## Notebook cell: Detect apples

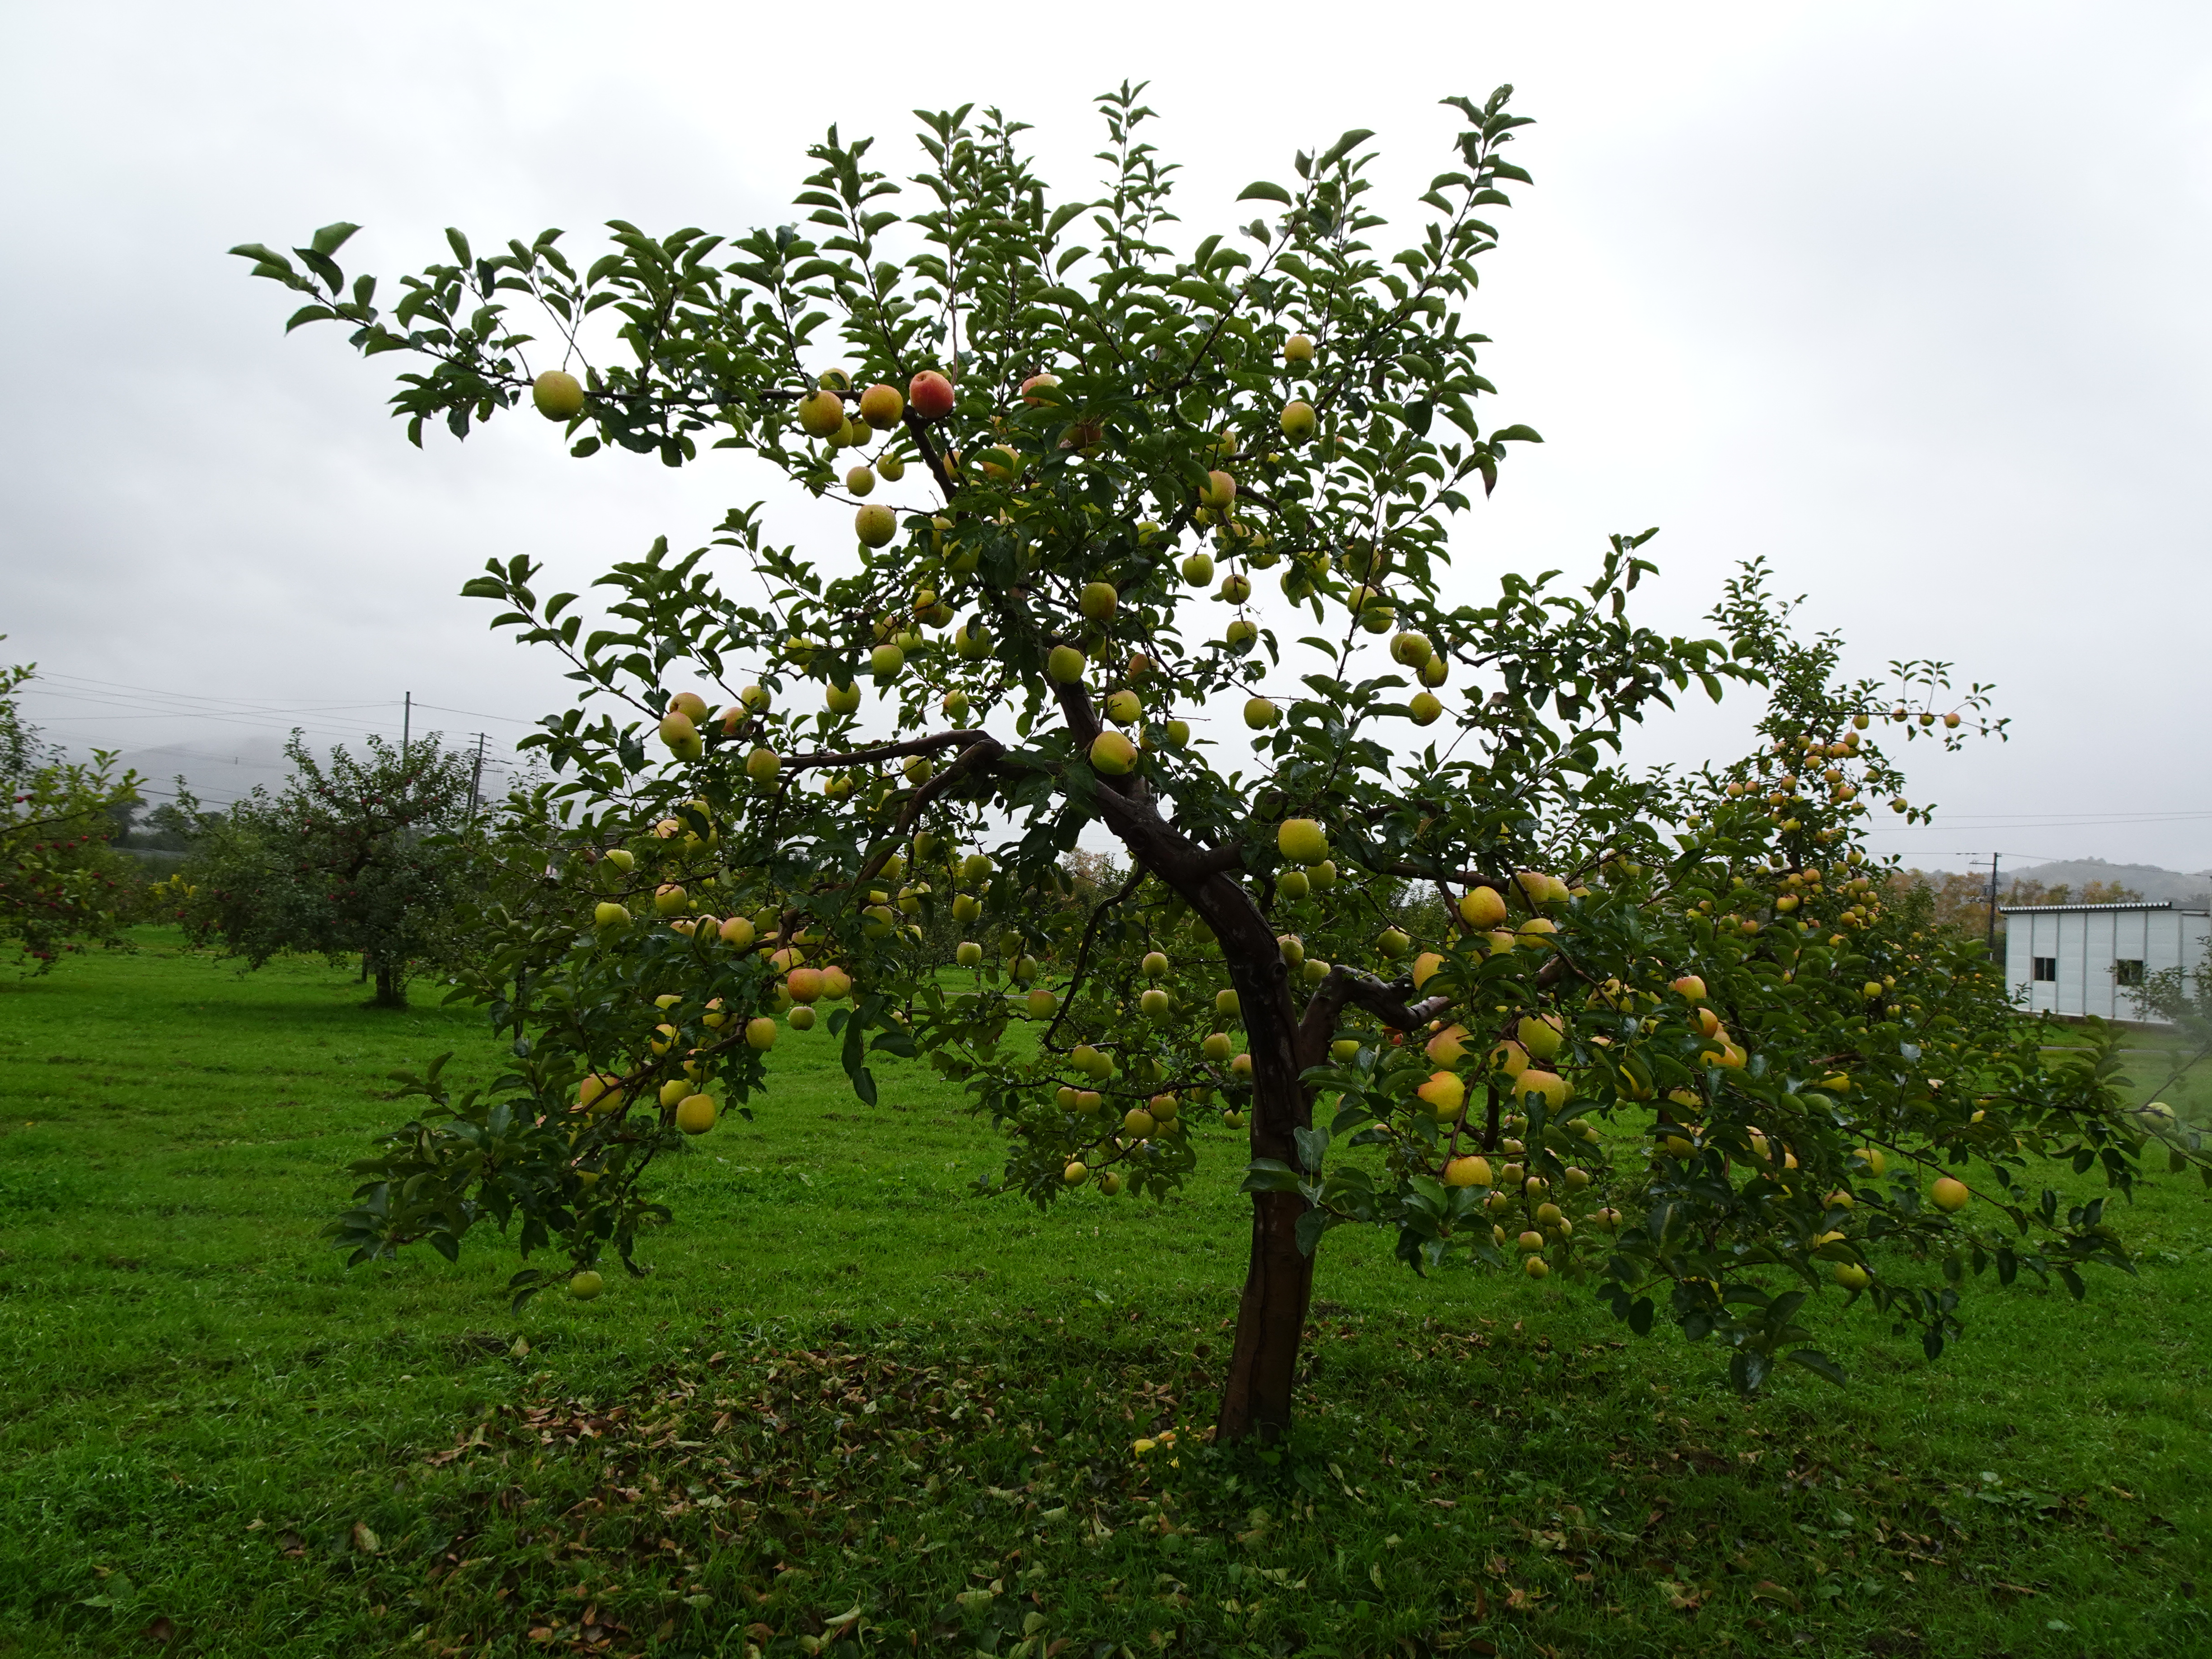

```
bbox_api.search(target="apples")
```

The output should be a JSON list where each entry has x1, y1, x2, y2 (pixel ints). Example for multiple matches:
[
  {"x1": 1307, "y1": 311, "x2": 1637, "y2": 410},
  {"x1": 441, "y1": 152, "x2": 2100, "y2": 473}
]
[
  {"x1": 1303, "y1": 959, "x2": 1331, "y2": 987},
  {"x1": 719, "y1": 706, "x2": 754, "y2": 736},
  {"x1": 1086, "y1": 1053, "x2": 1114, "y2": 1081},
  {"x1": 1833, "y1": 1261, "x2": 1868, "y2": 1290},
  {"x1": 799, "y1": 390, "x2": 843, "y2": 439},
  {"x1": 1537, "y1": 1203, "x2": 1561, "y2": 1227},
  {"x1": 670, "y1": 919, "x2": 695, "y2": 939},
  {"x1": 1099, "y1": 1172, "x2": 1120, "y2": 1197},
  {"x1": 1204, "y1": 498, "x2": 1235, "y2": 524},
  {"x1": 1444, "y1": 1156, "x2": 1492, "y2": 1188},
  {"x1": 819, "y1": 368, "x2": 851, "y2": 392},
  {"x1": 1517, "y1": 918, "x2": 1558, "y2": 950},
  {"x1": 745, "y1": 1017, "x2": 777, "y2": 1050},
  {"x1": 1515, "y1": 1070, "x2": 1565, "y2": 1116},
  {"x1": 785, "y1": 636, "x2": 814, "y2": 666},
  {"x1": 1276, "y1": 934, "x2": 1301, "y2": 945},
  {"x1": 1501, "y1": 1163, "x2": 1524, "y2": 1185},
  {"x1": 1071, "y1": 1044, "x2": 1099, "y2": 1072},
  {"x1": 1614, "y1": 1062, "x2": 1652, "y2": 1102},
  {"x1": 1712, "y1": 1031, "x2": 1731, "y2": 1045},
  {"x1": 787, "y1": 969, "x2": 826, "y2": 1003},
  {"x1": 1154, "y1": 1117, "x2": 1179, "y2": 1140},
  {"x1": 790, "y1": 1006, "x2": 816, "y2": 1031},
  {"x1": 1137, "y1": 522, "x2": 1160, "y2": 542},
  {"x1": 1182, "y1": 553, "x2": 1214, "y2": 587},
  {"x1": 703, "y1": 998, "x2": 738, "y2": 1034},
  {"x1": 914, "y1": 831, "x2": 939, "y2": 860},
  {"x1": 1563, "y1": 1081, "x2": 1575, "y2": 1102},
  {"x1": 1472, "y1": 931, "x2": 1516, "y2": 966},
  {"x1": 1164, "y1": 721, "x2": 1190, "y2": 749},
  {"x1": 878, "y1": 853, "x2": 902, "y2": 880},
  {"x1": 800, "y1": 643, "x2": 825, "y2": 675},
  {"x1": 1246, "y1": 533, "x2": 1281, "y2": 569},
  {"x1": 1565, "y1": 1167, "x2": 1589, "y2": 1193},
  {"x1": 915, "y1": 516, "x2": 952, "y2": 552},
  {"x1": 755, "y1": 904, "x2": 785, "y2": 936},
  {"x1": 1518, "y1": 1232, "x2": 1544, "y2": 1254},
  {"x1": 747, "y1": 748, "x2": 781, "y2": 783},
  {"x1": 612, "y1": 904, "x2": 632, "y2": 931},
  {"x1": 1675, "y1": 976, "x2": 1706, "y2": 1001},
  {"x1": 1730, "y1": 1125, "x2": 1769, "y2": 1167},
  {"x1": 1342, "y1": 544, "x2": 1353, "y2": 573},
  {"x1": 1570, "y1": 886, "x2": 1591, "y2": 897},
  {"x1": 741, "y1": 685, "x2": 772, "y2": 715},
  {"x1": 855, "y1": 504, "x2": 897, "y2": 549},
  {"x1": 1592, "y1": 978, "x2": 1634, "y2": 1013},
  {"x1": 1484, "y1": 1191, "x2": 1507, "y2": 1214},
  {"x1": 1527, "y1": 1176, "x2": 1550, "y2": 1199},
  {"x1": 676, "y1": 1094, "x2": 717, "y2": 1136},
  {"x1": 1191, "y1": 502, "x2": 1209, "y2": 525},
  {"x1": 1417, "y1": 1071, "x2": 1465, "y2": 1124},
  {"x1": 825, "y1": 415, "x2": 853, "y2": 448},
  {"x1": 1142, "y1": 952, "x2": 1168, "y2": 978},
  {"x1": 1091, "y1": 637, "x2": 1117, "y2": 661},
  {"x1": 1278, "y1": 939, "x2": 1304, "y2": 970},
  {"x1": 1569, "y1": 1119, "x2": 1589, "y2": 1137},
  {"x1": 1416, "y1": 654, "x2": 1449, "y2": 688},
  {"x1": 605, "y1": 847, "x2": 635, "y2": 875},
  {"x1": 1064, "y1": 1151, "x2": 1077, "y2": 1167},
  {"x1": 1090, "y1": 730, "x2": 1138, "y2": 775},
  {"x1": 826, "y1": 681, "x2": 861, "y2": 715},
  {"x1": 1081, "y1": 582, "x2": 1117, "y2": 622},
  {"x1": 952, "y1": 894, "x2": 982, "y2": 922},
  {"x1": 1518, "y1": 1009, "x2": 1563, "y2": 1059},
  {"x1": 670, "y1": 692, "x2": 707, "y2": 727},
  {"x1": 1284, "y1": 336, "x2": 1314, "y2": 362},
  {"x1": 655, "y1": 995, "x2": 683, "y2": 1021},
  {"x1": 1280, "y1": 569, "x2": 1315, "y2": 600},
  {"x1": 1822, "y1": 1190, "x2": 1855, "y2": 1210},
  {"x1": 1762, "y1": 1152, "x2": 1797, "y2": 1180},
  {"x1": 756, "y1": 931, "x2": 795, "y2": 962},
  {"x1": 1128, "y1": 653, "x2": 1159, "y2": 682},
  {"x1": 720, "y1": 918, "x2": 755, "y2": 953},
  {"x1": 943, "y1": 450, "x2": 972, "y2": 481},
  {"x1": 1191, "y1": 1087, "x2": 1214, "y2": 1104},
  {"x1": 692, "y1": 914, "x2": 724, "y2": 942},
  {"x1": 1686, "y1": 1007, "x2": 1718, "y2": 1039},
  {"x1": 1128, "y1": 1138, "x2": 1149, "y2": 1161},
  {"x1": 1189, "y1": 915, "x2": 1216, "y2": 943},
  {"x1": 1139, "y1": 722, "x2": 1161, "y2": 753},
  {"x1": 1297, "y1": 547, "x2": 1330, "y2": 577},
  {"x1": 659, "y1": 1078, "x2": 695, "y2": 1113},
  {"x1": 868, "y1": 806, "x2": 891, "y2": 829},
  {"x1": 1278, "y1": 819, "x2": 1322, "y2": 864},
  {"x1": 1678, "y1": 1123, "x2": 1705, "y2": 1143},
  {"x1": 896, "y1": 924, "x2": 922, "y2": 940},
  {"x1": 1297, "y1": 832, "x2": 1329, "y2": 866},
  {"x1": 964, "y1": 854, "x2": 993, "y2": 884},
  {"x1": 791, "y1": 926, "x2": 826, "y2": 959},
  {"x1": 1007, "y1": 954, "x2": 1037, "y2": 987},
  {"x1": 1931, "y1": 1177, "x2": 1969, "y2": 1214},
  {"x1": 1668, "y1": 1087, "x2": 1704, "y2": 1124},
  {"x1": 1141, "y1": 989, "x2": 1169, "y2": 1018},
  {"x1": 570, "y1": 1271, "x2": 603, "y2": 1300},
  {"x1": 1021, "y1": 373, "x2": 1061, "y2": 406},
  {"x1": 1596, "y1": 1207, "x2": 1622, "y2": 1235},
  {"x1": 895, "y1": 621, "x2": 924, "y2": 642},
  {"x1": 1373, "y1": 1123, "x2": 1391, "y2": 1134},
  {"x1": 1335, "y1": 1094, "x2": 1345, "y2": 1114},
  {"x1": 860, "y1": 384, "x2": 904, "y2": 430},
  {"x1": 1716, "y1": 1023, "x2": 1724, "y2": 1032},
  {"x1": 1120, "y1": 910, "x2": 1146, "y2": 928},
  {"x1": 1125, "y1": 1108, "x2": 1159, "y2": 1140},
  {"x1": 1813, "y1": 1231, "x2": 1846, "y2": 1248},
  {"x1": 955, "y1": 626, "x2": 994, "y2": 662},
  {"x1": 1501, "y1": 1140, "x2": 1525, "y2": 1161},
  {"x1": 769, "y1": 948, "x2": 807, "y2": 975},
  {"x1": 1491, "y1": 1224, "x2": 1506, "y2": 1247},
  {"x1": 1820, "y1": 1070, "x2": 1850, "y2": 1095},
  {"x1": 1076, "y1": 1092, "x2": 1102, "y2": 1117},
  {"x1": 903, "y1": 755, "x2": 933, "y2": 785},
  {"x1": 1496, "y1": 928, "x2": 1518, "y2": 946},
  {"x1": 850, "y1": 418, "x2": 872, "y2": 447},
  {"x1": 918, "y1": 882, "x2": 931, "y2": 893},
  {"x1": 898, "y1": 885, "x2": 925, "y2": 914},
  {"x1": 983, "y1": 443, "x2": 1028, "y2": 486},
  {"x1": 1064, "y1": 1162, "x2": 1088, "y2": 1186},
  {"x1": 1101, "y1": 1138, "x2": 1124, "y2": 1157},
  {"x1": 659, "y1": 711, "x2": 694, "y2": 749},
  {"x1": 1319, "y1": 436, "x2": 1345, "y2": 462},
  {"x1": 1305, "y1": 860, "x2": 1336, "y2": 891},
  {"x1": 1205, "y1": 429, "x2": 1238, "y2": 454},
  {"x1": 653, "y1": 820, "x2": 679, "y2": 838},
  {"x1": 677, "y1": 801, "x2": 709, "y2": 831},
  {"x1": 1281, "y1": 401, "x2": 1317, "y2": 442},
  {"x1": 862, "y1": 905, "x2": 893, "y2": 941},
  {"x1": 1578, "y1": 1127, "x2": 1597, "y2": 1146},
  {"x1": 846, "y1": 466, "x2": 875, "y2": 497},
  {"x1": 1216, "y1": 989, "x2": 1241, "y2": 1020},
  {"x1": 1782, "y1": 1144, "x2": 1790, "y2": 1153},
  {"x1": 1107, "y1": 690, "x2": 1142, "y2": 724},
  {"x1": 624, "y1": 1067, "x2": 635, "y2": 1079},
  {"x1": 1489, "y1": 1040, "x2": 1530, "y2": 1080},
  {"x1": 1413, "y1": 952, "x2": 1446, "y2": 991},
  {"x1": 909, "y1": 370, "x2": 954, "y2": 419},
  {"x1": 1150, "y1": 1094, "x2": 1178, "y2": 1122},
  {"x1": 1362, "y1": 607, "x2": 1394, "y2": 634},
  {"x1": 1378, "y1": 926, "x2": 1410, "y2": 960},
  {"x1": 878, "y1": 789, "x2": 894, "y2": 809},
  {"x1": 944, "y1": 690, "x2": 968, "y2": 717},
  {"x1": 1698, "y1": 1044, "x2": 1739, "y2": 1067},
  {"x1": 1398, "y1": 634, "x2": 1432, "y2": 668},
  {"x1": 1244, "y1": 698, "x2": 1275, "y2": 730},
  {"x1": 670, "y1": 729, "x2": 702, "y2": 762},
  {"x1": 1425, "y1": 1022, "x2": 1474, "y2": 1072},
  {"x1": 1028, "y1": 989, "x2": 1057, "y2": 1021},
  {"x1": 1226, "y1": 621, "x2": 1258, "y2": 647},
  {"x1": 913, "y1": 590, "x2": 943, "y2": 623},
  {"x1": 533, "y1": 370, "x2": 584, "y2": 422},
  {"x1": 1725, "y1": 1043, "x2": 1747, "y2": 1070},
  {"x1": 1200, "y1": 470, "x2": 1236, "y2": 509},
  {"x1": 998, "y1": 933, "x2": 1027, "y2": 958},
  {"x1": 821, "y1": 966, "x2": 851, "y2": 1000},
  {"x1": 1164, "y1": 1089, "x2": 1183, "y2": 1106},
  {"x1": 1546, "y1": 876, "x2": 1570, "y2": 901},
  {"x1": 1509, "y1": 871, "x2": 1550, "y2": 912},
  {"x1": 651, "y1": 1024, "x2": 682, "y2": 1056},
  {"x1": 683, "y1": 1048, "x2": 722, "y2": 1083},
  {"x1": 1525, "y1": 1257, "x2": 1549, "y2": 1279},
  {"x1": 1140, "y1": 1059, "x2": 1162, "y2": 1083},
  {"x1": 1281, "y1": 871, "x2": 1309, "y2": 900},
  {"x1": 1544, "y1": 1148, "x2": 1557, "y2": 1158},
  {"x1": 2142, "y1": 1102, "x2": 2176, "y2": 1131},
  {"x1": 1852, "y1": 1148, "x2": 1884, "y2": 1179},
  {"x1": 956, "y1": 941, "x2": 981, "y2": 967},
  {"x1": 1460, "y1": 886, "x2": 1507, "y2": 930},
  {"x1": 1222, "y1": 574, "x2": 1251, "y2": 605},
  {"x1": 1056, "y1": 1087, "x2": 1081, "y2": 1113},
  {"x1": 915, "y1": 575, "x2": 934, "y2": 593},
  {"x1": 890, "y1": 632, "x2": 922, "y2": 656},
  {"x1": 1049, "y1": 644, "x2": 1086, "y2": 684},
  {"x1": 1331, "y1": 1040, "x2": 1361, "y2": 1064},
  {"x1": 871, "y1": 645, "x2": 904, "y2": 680},
  {"x1": 635, "y1": 1060, "x2": 652, "y2": 1074},
  {"x1": 595, "y1": 902, "x2": 624, "y2": 933},
  {"x1": 580, "y1": 1073, "x2": 625, "y2": 1114},
  {"x1": 1204, "y1": 1033, "x2": 1232, "y2": 1062},
  {"x1": 877, "y1": 452, "x2": 905, "y2": 482},
  {"x1": 928, "y1": 604, "x2": 954, "y2": 629},
  {"x1": 1547, "y1": 1218, "x2": 1572, "y2": 1239},
  {"x1": 824, "y1": 775, "x2": 853, "y2": 802},
  {"x1": 1259, "y1": 453, "x2": 1280, "y2": 471},
  {"x1": 1051, "y1": 630, "x2": 1062, "y2": 636},
  {"x1": 1223, "y1": 1109, "x2": 1244, "y2": 1130},
  {"x1": 1233, "y1": 1053, "x2": 1252, "y2": 1078},
  {"x1": 1390, "y1": 633, "x2": 1414, "y2": 664},
  {"x1": 1347, "y1": 583, "x2": 1378, "y2": 615},
  {"x1": 1408, "y1": 692, "x2": 1442, "y2": 726},
  {"x1": 1215, "y1": 518, "x2": 1243, "y2": 539},
  {"x1": 1503, "y1": 1113, "x2": 1527, "y2": 1137},
  {"x1": 873, "y1": 616, "x2": 900, "y2": 640},
  {"x1": 762, "y1": 983, "x2": 791, "y2": 1015},
  {"x1": 655, "y1": 884, "x2": 688, "y2": 917}
]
